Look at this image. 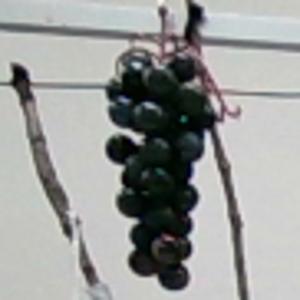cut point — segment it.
<instances>
[{
  "label": "cut point",
  "instance_id": "obj_1",
  "mask_svg": "<svg viewBox=\"0 0 300 300\" xmlns=\"http://www.w3.org/2000/svg\"><path fill=\"white\" fill-rule=\"evenodd\" d=\"M156 14L160 20V59L159 67L166 65V20L168 18V0H156Z\"/></svg>",
  "mask_w": 300,
  "mask_h": 300
}]
</instances>
